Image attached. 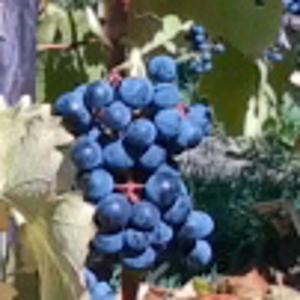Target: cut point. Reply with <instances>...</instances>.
Segmentation results:
<instances>
[{
  "label": "cut point",
  "instance_id": "obj_1",
  "mask_svg": "<svg viewBox=\"0 0 300 300\" xmlns=\"http://www.w3.org/2000/svg\"><path fill=\"white\" fill-rule=\"evenodd\" d=\"M124 47L129 50L128 58L131 60V71L134 76L146 73V63L143 59L137 44L129 37L125 36Z\"/></svg>",
  "mask_w": 300,
  "mask_h": 300
}]
</instances>
